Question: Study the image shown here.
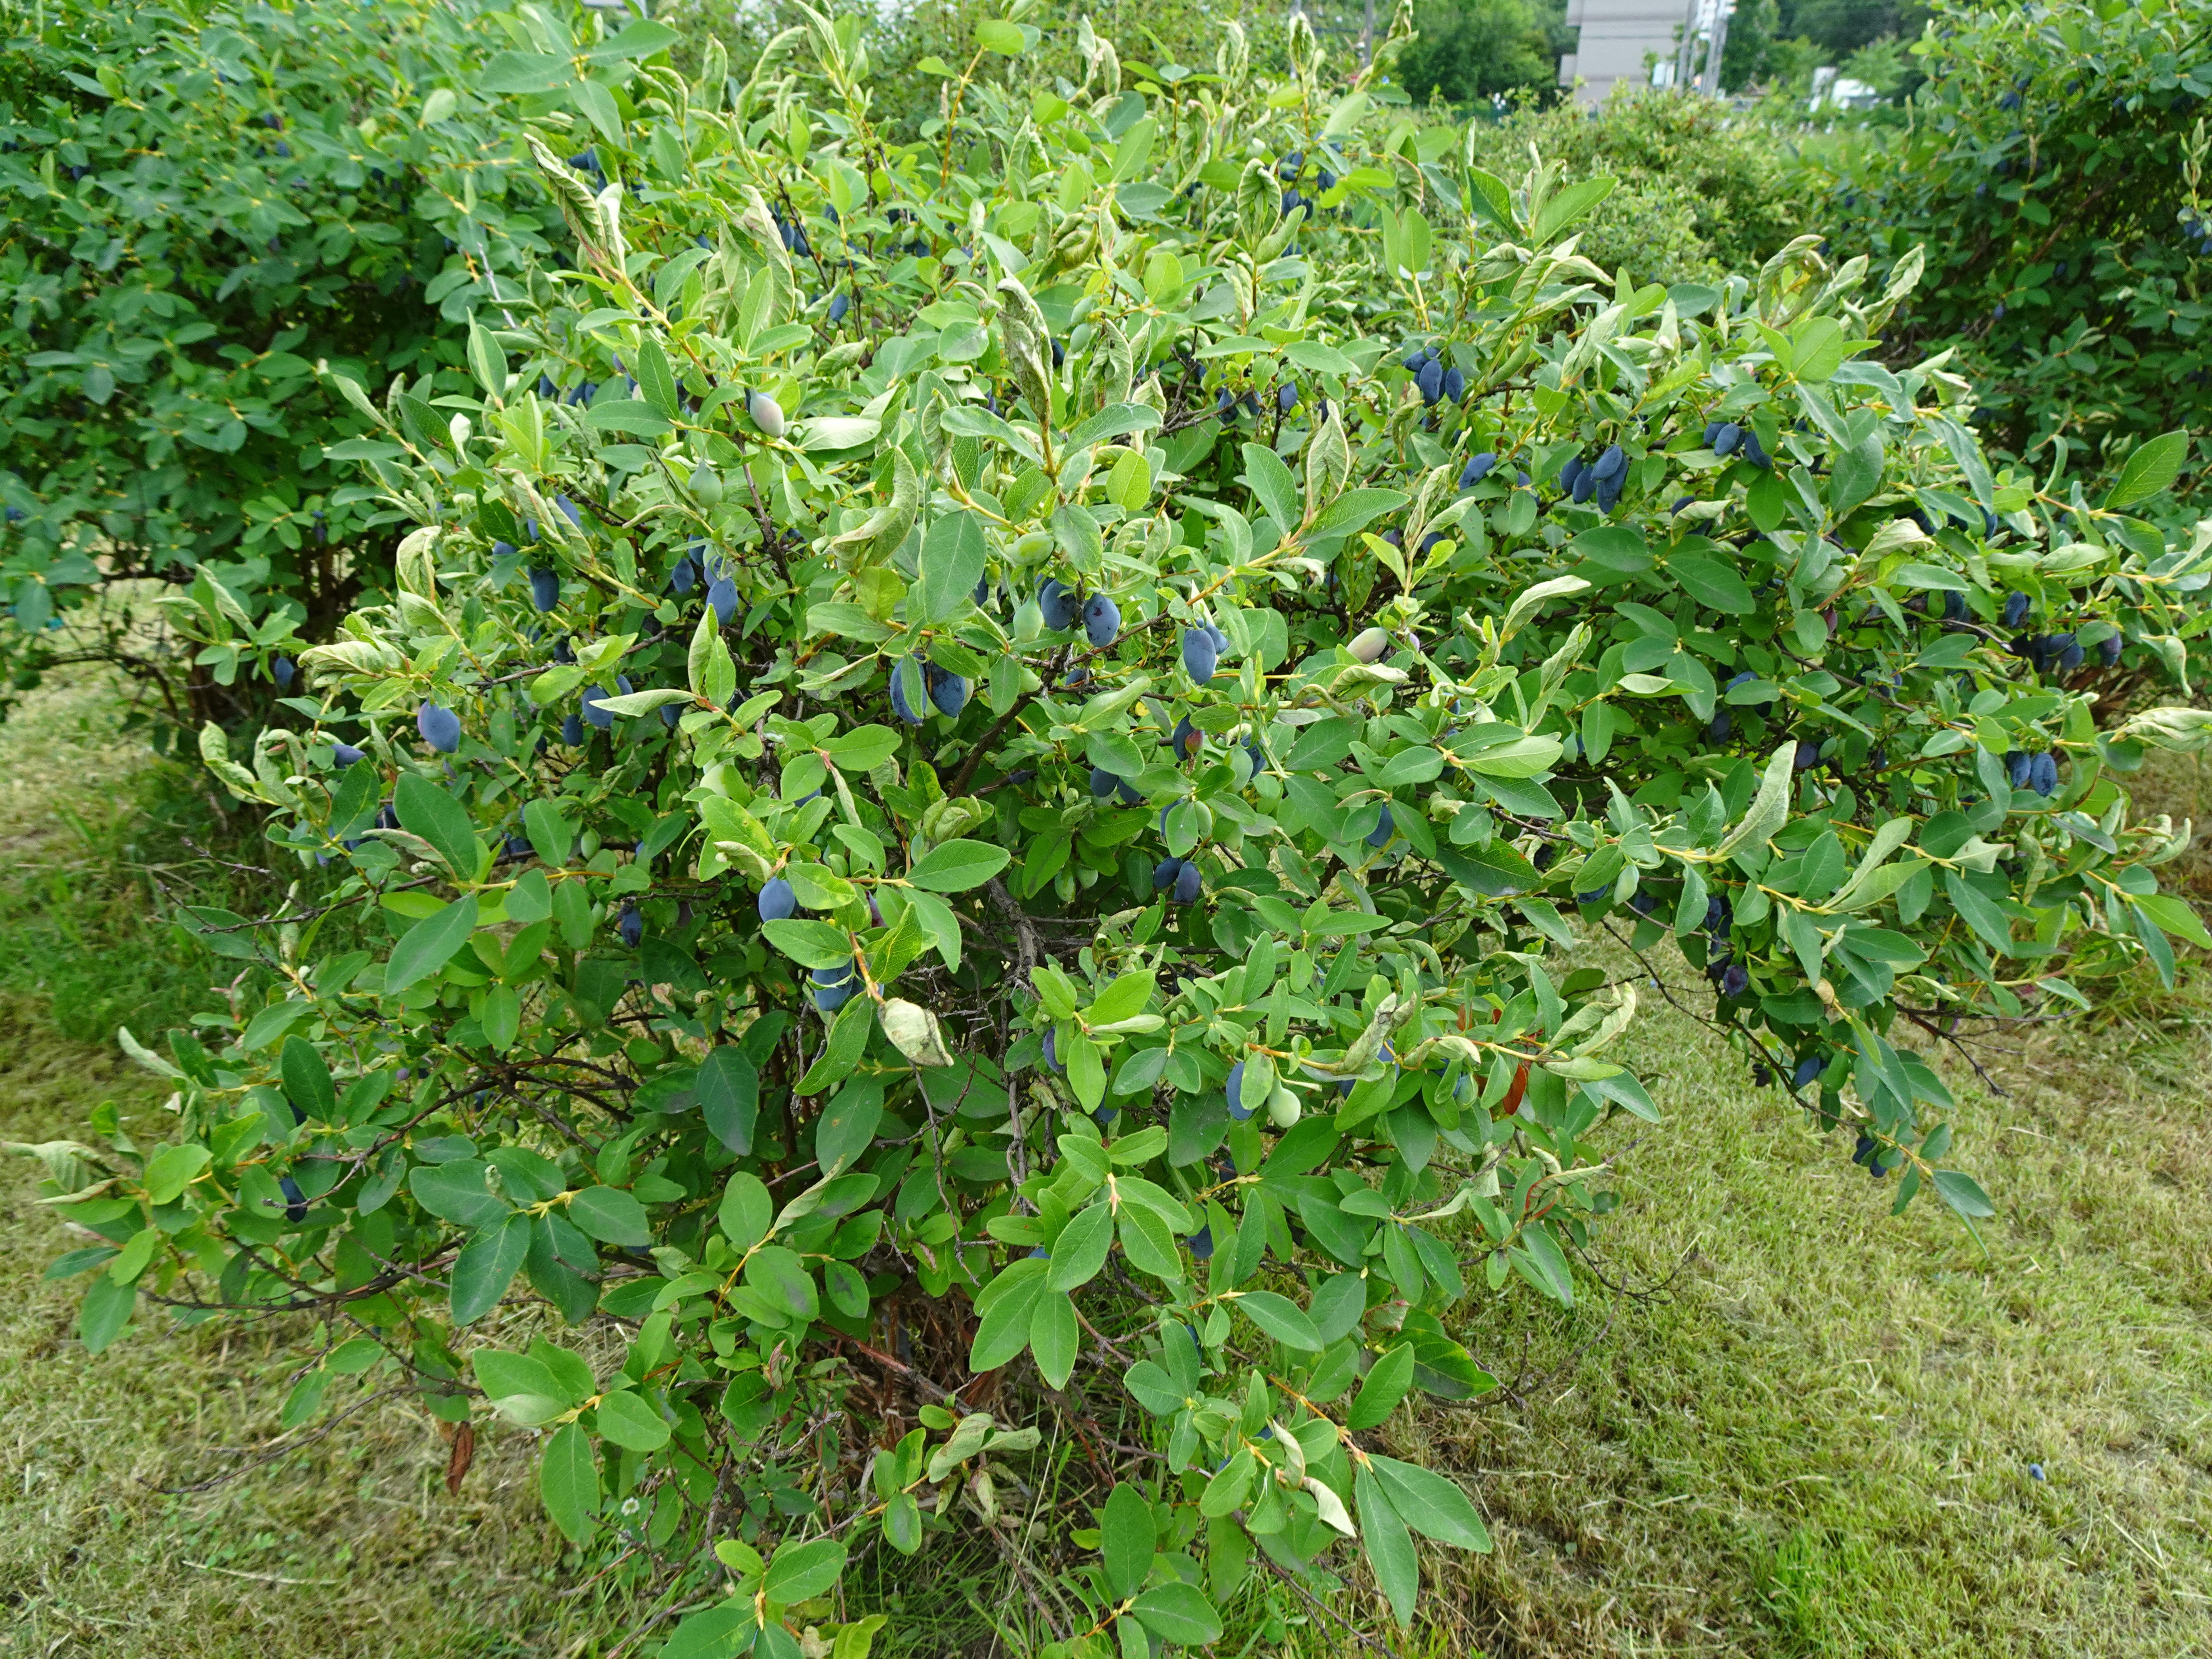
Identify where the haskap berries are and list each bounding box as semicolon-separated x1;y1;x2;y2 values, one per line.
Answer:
1137;364;1145;378
904;208;918;223
787;528;807;554
1579;883;1610;904
671;555;695;593
678;395;683;410
1118;775;1142;803
1834;534;1844;544
1737;536;1755;550
1708;933;1721;956
397;1067;410;1080
581;686;614;727
1767;577;1783;589
1037;199;1043;205
1687;518;1711;536
744;387;750;415
1921;517;1935;536
1404;351;1426;380
622;910;644;948
587;147;600;171
2095;632;2122;668
851;958;884;999
837;240;857;267
924;693;942;718
2069;586;2087;603
659;702;685;727
298;848;315;869
1042;1027;1070;1077
488;837;510;865
684;390;703;412
758;876;796;925
1422;414;1438;434
1518;452;1529;465
1096;1067;1120;1125
975;572;988;608
1951;672;1965;690
640;307;649;317
1872;747;1886;770
1712;729;1730;747
1304;197;1313;220
1795;419;1811;435
901;226;916;245
474;1093;484;1112
1552;472;1560;497
539;375;553;397
1426;346;1444;360
419;1069;430;1080
1577;734;1587;754
871;316;884;330
2029;632;2053;672
920;230;931;246
555;493;581;530
1418;360;1448;401
1725;670;1758;696
1453;429;1466;450
1534;843;1553;866
703;741;735;775
1745;429;1777;473
382;804;403;829
866;891;889;929
1711;954;1732;980
793;228;808;257
615;899;635;923
563;715;582;748
1036;777;1058;800
1894;511;1910;519
1055;869;1076;904
2004;748;2031;792
1159;359;1165;369
534;567;560;611
627;374;637;391
888;208;900;225
1561;455;1584;492
704;555;730;590
566;380;586;405
1845;547;1856;555
1722;966;1747;999
688;531;706;566
1941;606;1969;633
613;352;626;374
520;804;527;823
926;651;970;718
2032;750;2060;797
1282;190;1293;217
810;293;822;305
632;177;651;205
794;787;822;808
327;826;335;839
925;199;935;215
1004;530;1053;566
1281;244;1291;258
824;204;839;225
1321;398;1329;425
505;833;531;864
1856;1135;1866;1150
2061;638;2085;669
1747;529;1759;541
1864;724;1874;738
1050;338;1065;368
1870;1157;1887;1177
1285;148;1294;162
316;850;330;866
1910;508;1926;525
945;220;955;234
676;900;692;927
561;337;567;343
778;218;794;252
429;502;442;515
1794;432;1827;473
1518;471;1539;503
889;654;924;726
1829;528;1837;538
1292;151;1303;167
1316;965;1326;985
1037;561;1053;604
2005;632;2029;657
750;387;784;436
1449;699;1460;715
1193;800;1211;832
1711;710;1731;737
1083;590;1120;650
1796;742;1817;768
1014;591;1047;641
1246;388;1262;417
1730;1034;1742;1051
1956;517;1968;532
1326;171;1336;189
417;697;463;753
1186;182;1195;198
1614;866;1639;906
967;398;974;406
707;575;738;628
2091;575;2111;601
1701;418;1728;443
1173;861;1200;901
1289;188;1299;208
1217;390;1237;423
854;248;870;269
340;840;352;858
765;200;779;222
1730;505;1735;515
984;387;992;399
872;306;889;324
1386;528;1400;547
1459;452;1496;491
1979;505;1998;541
360;817;384;844
636;842;645;856
598;179;606;193
481;1089;494;1099
1730;538;1738;548
994;407;1002;419
976;365;988;379
586;382;597;402
1199;364;1211;379
555;638;576;662
1634;890;1654;916
349;837;361;851
1732;703;1742;712
274;656;294;690
1584;852;1593;864
2049;631;2071;654
277;1176;309;1224
1196;619;1228;655
1850;661;1878;689
1364;219;1371;230
1314;130;1323;141
1196;181;1203;189
1198;222;1202;231
632;384;639;401
1269;1077;1302;1127
1325;206;1337;218
1240;731;1266;780
1938;1016;1959;1033
989;397;997;412
1214;373;1226;400
527;564;536;586
1729;429;1745;453
493;540;515;565
915;240;930;258
2061;511;2070;524
1183;627;1217;685
1174;715;1204;760
648;271;656;292
1434;1057;1461;1099
994;585;1007;616
568;153;590;170
1294;416;1308;431
1474;231;1478;237
335;763;347;782
885;244;901;254
1066;668;1094;686
1879;669;1902;696
1420;531;1441;554
1947;513;1956;526
1345;627;1387;663
1008;768;1029;785
1317;169;1327;193
1715;423;1741;457
1041;578;1074;631
2004;590;2029;630
1822;605;1837;638
1161;798;1182;838
689;459;723;509
1592;445;1622;478
830;293;848;321
1280;381;1296;410
1755;375;1761;384
1154;855;1183;887
1331;142;1341;153
1017;665;1041;692
1226;1060;1258;1121
962;676;975;708
1702;895;1728;933
1966;631;1986;644
1289;242;1302;255
527;517;542;540
1561;732;1578;763
1219;1156;1236;1187
684;407;694;419
645;300;673;329
1076;860;1098;889
1089;765;1121;798
903;240;915;253
961;247;967;254
1754;700;1772;717
1738;567;1766;596
1903;602;1916;621
310;510;325;519
599;168;627;189
1222;747;1253;795
698;757;735;815
675;381;689;398
1599;456;1628;513
1342;1039;1401;1100
811;954;853;1010
696;234;710;250
1188;1223;1214;1262
1960;795;1977;812
314;524;325;545
615;675;633;695
1444;368;1466;404
1941;589;1964;623
1793;1056;1822;1088
823;843;832;865
1757;532;1768;543
704;544;716;568
759;394;773;401
1908;597;1929;611
1438;729;1460;775
1026;1248;1051;1262
1296;197;1306;222
1573;458;1598;506
1399;468;1414;475
1868;606;1880;618
526;626;541;642
1672;496;1694;518
1852;1139;1875;1166
1223;822;1245;850
1280;169;1296;182
1364;806;1395;847
329;744;365;765
966;248;973;259
1307;571;1338;585
442;761;456;785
